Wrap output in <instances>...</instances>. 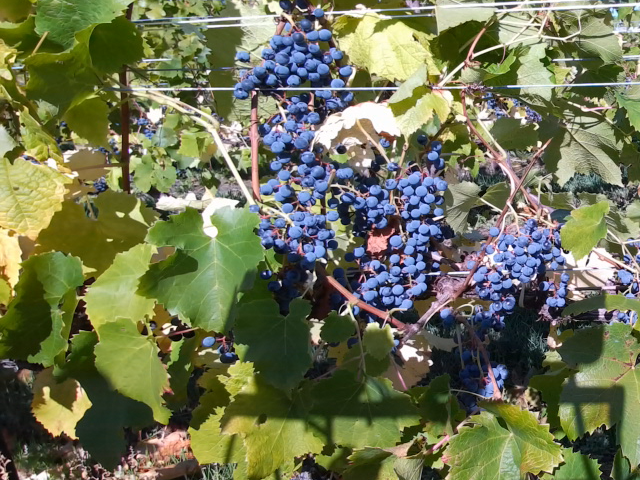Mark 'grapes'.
<instances>
[{
  "label": "grapes",
  "instance_id": "obj_8",
  "mask_svg": "<svg viewBox=\"0 0 640 480\" xmlns=\"http://www.w3.org/2000/svg\"><path fill=\"white\" fill-rule=\"evenodd\" d=\"M441 149L442 143L437 139H433L431 141V149L427 151V160L429 162H434L433 166L437 170H442L444 168V159L439 155L441 153Z\"/></svg>",
  "mask_w": 640,
  "mask_h": 480
},
{
  "label": "grapes",
  "instance_id": "obj_12",
  "mask_svg": "<svg viewBox=\"0 0 640 480\" xmlns=\"http://www.w3.org/2000/svg\"><path fill=\"white\" fill-rule=\"evenodd\" d=\"M485 383L487 385H485L483 388H481L479 390V393L483 396V397H490L494 394V384L492 383L491 377L489 375H486L484 377Z\"/></svg>",
  "mask_w": 640,
  "mask_h": 480
},
{
  "label": "grapes",
  "instance_id": "obj_3",
  "mask_svg": "<svg viewBox=\"0 0 640 480\" xmlns=\"http://www.w3.org/2000/svg\"><path fill=\"white\" fill-rule=\"evenodd\" d=\"M271 48H263L261 57L265 63L243 70L239 73L240 81L233 87V94L238 99H247L249 92L256 85L262 86H299L306 79L319 82L321 76L329 73L332 60H341L343 53L336 47L329 50V55L319 44H307L302 33L292 31L290 36L274 34L269 40Z\"/></svg>",
  "mask_w": 640,
  "mask_h": 480
},
{
  "label": "grapes",
  "instance_id": "obj_9",
  "mask_svg": "<svg viewBox=\"0 0 640 480\" xmlns=\"http://www.w3.org/2000/svg\"><path fill=\"white\" fill-rule=\"evenodd\" d=\"M217 351L220 355V357L218 358V361L220 363H230L232 361H236L239 358V354L237 352L224 349V346L222 344H219L217 346Z\"/></svg>",
  "mask_w": 640,
  "mask_h": 480
},
{
  "label": "grapes",
  "instance_id": "obj_11",
  "mask_svg": "<svg viewBox=\"0 0 640 480\" xmlns=\"http://www.w3.org/2000/svg\"><path fill=\"white\" fill-rule=\"evenodd\" d=\"M634 274L625 268H620L617 272V278L624 286H628L633 282Z\"/></svg>",
  "mask_w": 640,
  "mask_h": 480
},
{
  "label": "grapes",
  "instance_id": "obj_2",
  "mask_svg": "<svg viewBox=\"0 0 640 480\" xmlns=\"http://www.w3.org/2000/svg\"><path fill=\"white\" fill-rule=\"evenodd\" d=\"M538 222L535 218H530L520 228L522 234L516 238L514 234L502 233L499 227L491 226L488 234L493 238L499 237L497 248L501 251L493 256L496 271L488 274L486 266L478 267L472 276L476 294L485 301H491L489 309L482 304L474 307L472 320L480 323L482 329L491 327L496 332H501L505 323V315H512L516 306V299L513 295L502 298L504 290L513 288V280L519 283H530L532 275L543 274L546 265L543 261H551L550 267L565 266L567 258L560 252V229L563 223H559L553 230V237H550L551 230H538Z\"/></svg>",
  "mask_w": 640,
  "mask_h": 480
},
{
  "label": "grapes",
  "instance_id": "obj_7",
  "mask_svg": "<svg viewBox=\"0 0 640 480\" xmlns=\"http://www.w3.org/2000/svg\"><path fill=\"white\" fill-rule=\"evenodd\" d=\"M299 28L307 34V38L310 42H329L332 38V31L329 28H323L320 31L314 30L312 22L308 18H303L299 22Z\"/></svg>",
  "mask_w": 640,
  "mask_h": 480
},
{
  "label": "grapes",
  "instance_id": "obj_6",
  "mask_svg": "<svg viewBox=\"0 0 640 480\" xmlns=\"http://www.w3.org/2000/svg\"><path fill=\"white\" fill-rule=\"evenodd\" d=\"M570 281V275L566 272L560 274L559 288L554 293V296H550L545 300V304L551 308H562L566 305V295L568 294V282Z\"/></svg>",
  "mask_w": 640,
  "mask_h": 480
},
{
  "label": "grapes",
  "instance_id": "obj_1",
  "mask_svg": "<svg viewBox=\"0 0 640 480\" xmlns=\"http://www.w3.org/2000/svg\"><path fill=\"white\" fill-rule=\"evenodd\" d=\"M292 104H287L285 109L290 113L286 116L287 120L282 122V127L289 133L296 132L298 136L291 137L280 130H273L269 123H263L259 126V134L264 136L262 143L269 145V150L276 154V160L269 164V169L276 172L277 179H270L265 185L260 186V193L265 196L274 194L276 202L284 201L286 198H293L295 191L289 185L281 186L280 181H288L291 173L282 169L281 163H288L291 155L285 150L296 147L300 151V160L304 164L297 166V174L301 176L300 183L303 187H314L312 195L307 191L299 190L297 192V201L304 207L314 205L316 200H322L325 197L324 191L328 188V179L330 170H335V177L341 180L353 178L359 181L360 185L356 186L358 193H368L369 197H357L354 192L346 191L341 196V201L351 205L357 210L355 215V223L353 224V234L356 237L367 238L368 231L372 224L377 229H385L388 225V216L395 214V205L389 203L390 192L396 189L402 193L401 200L404 202L403 210L400 216L404 221L405 230L412 234V238L405 241L403 254L407 256L404 259V266L388 267L380 260L372 258L366 254L367 246L361 244L353 248V253L348 252L345 255L347 262L360 261L362 269L371 268L378 273L369 275L365 283L359 285L360 290H355L353 295L357 298L370 302V305L379 307L380 305L389 306L394 304L399 308H411L413 306L412 297L419 296L427 290V275L420 273L427 269V262L424 255L429 248L424 244H428L433 237L439 240L442 237V226L438 221L426 219L421 223L420 217H427L431 214V204L437 206L444 205L446 199L438 196L436 192H446L449 189V183L442 177H423L420 171H411L407 178H401L397 181L394 178H387L384 181V187L381 184H372L368 186L366 180L360 174L354 172L352 166L341 167L337 162H331L328 165H321L317 162L316 154L310 150L309 145L316 139L313 130H303L300 127L303 124L320 125L323 116L320 113H309L308 104L311 102V95L302 92L299 95L290 98ZM408 274L414 275L416 286L407 288L403 284H399L403 280V276Z\"/></svg>",
  "mask_w": 640,
  "mask_h": 480
},
{
  "label": "grapes",
  "instance_id": "obj_10",
  "mask_svg": "<svg viewBox=\"0 0 640 480\" xmlns=\"http://www.w3.org/2000/svg\"><path fill=\"white\" fill-rule=\"evenodd\" d=\"M613 317L617 322L623 320L628 324H634L638 320V315L633 311H628L627 313H621L620 311H617L613 314Z\"/></svg>",
  "mask_w": 640,
  "mask_h": 480
},
{
  "label": "grapes",
  "instance_id": "obj_5",
  "mask_svg": "<svg viewBox=\"0 0 640 480\" xmlns=\"http://www.w3.org/2000/svg\"><path fill=\"white\" fill-rule=\"evenodd\" d=\"M314 95L325 102L326 109H337L338 111L346 109L354 98L352 91L341 93L339 97L334 96V92L330 91H315Z\"/></svg>",
  "mask_w": 640,
  "mask_h": 480
},
{
  "label": "grapes",
  "instance_id": "obj_4",
  "mask_svg": "<svg viewBox=\"0 0 640 480\" xmlns=\"http://www.w3.org/2000/svg\"><path fill=\"white\" fill-rule=\"evenodd\" d=\"M293 203L284 202L282 204V210L290 214L289 219L295 226H289L287 228V235L291 239L286 245V242L282 239H277L275 232L271 229V223L267 217H263L259 223V231L257 235L263 240L261 244L265 248L275 246V252L277 254H286L287 261L289 263H297L299 261L298 250L300 248L299 240L303 234L306 237L316 235V239L312 243H305L302 251L305 253L302 256V260L298 264L301 270L313 269V263L316 259L324 258L326 256V248L330 251H335L338 247V242L332 239L335 236V232L332 229H325L327 219L329 221H337L339 219V213L336 210H330L325 215H313L309 211L295 210Z\"/></svg>",
  "mask_w": 640,
  "mask_h": 480
}]
</instances>
